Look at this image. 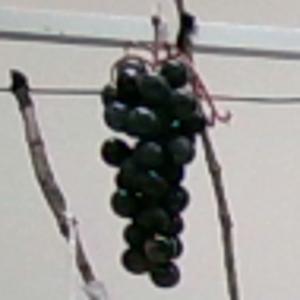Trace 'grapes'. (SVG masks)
<instances>
[{
	"label": "grapes",
	"instance_id": "01657485",
	"mask_svg": "<svg viewBox=\"0 0 300 300\" xmlns=\"http://www.w3.org/2000/svg\"><path fill=\"white\" fill-rule=\"evenodd\" d=\"M117 81L101 89L102 118L109 129L136 137L133 146L119 137L104 141L100 156L117 172V190L110 198L116 216L127 219L122 238L129 248L119 264L134 278L148 274L154 287L179 286L182 271L177 261L184 252L179 236L185 222L178 213L188 209L191 196L182 187L184 166L197 154V137L209 119L199 94L184 91L192 68L171 57L150 71L140 57L126 56L116 66Z\"/></svg>",
	"mask_w": 300,
	"mask_h": 300
}]
</instances>
